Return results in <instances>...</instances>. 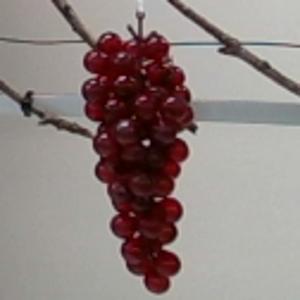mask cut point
Wrapping results in <instances>:
<instances>
[{"instance_id":"obj_1","label":"cut point","mask_w":300,"mask_h":300,"mask_svg":"<svg viewBox=\"0 0 300 300\" xmlns=\"http://www.w3.org/2000/svg\"><path fill=\"white\" fill-rule=\"evenodd\" d=\"M133 18L137 23L136 41L142 43V41L144 40V25L146 20L148 19V13L144 8V0H136V7L133 13Z\"/></svg>"}]
</instances>
